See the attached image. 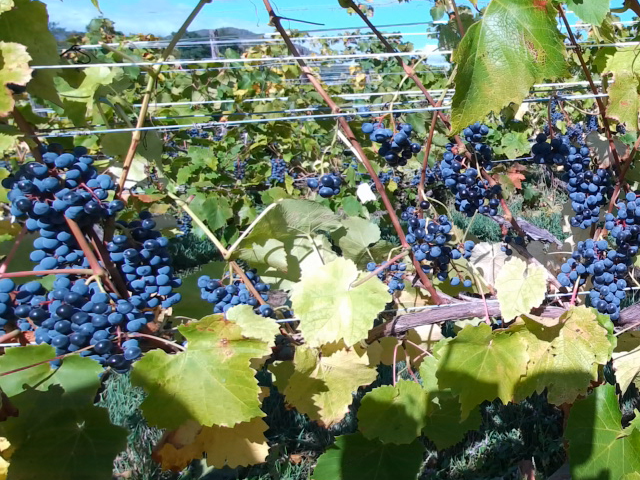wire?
<instances>
[{
	"label": "wire",
	"instance_id": "wire-1",
	"mask_svg": "<svg viewBox=\"0 0 640 480\" xmlns=\"http://www.w3.org/2000/svg\"><path fill=\"white\" fill-rule=\"evenodd\" d=\"M452 105H436L431 107H419V108H406V109H391L385 111H354V112H338V113H321L317 115H281L273 118H247L237 120H217L216 122H198L192 125L181 124H161L153 126H134V127H121L114 129H93L90 131L85 130H70L62 132H44V133H28V138H46V137H64L72 135L92 136L96 134H116L123 132H137V131H155L163 129H179V130H194L201 127H219L220 125H239L249 123H275L283 120H306L314 121L324 118H341V117H359V116H387V115H404L409 113H422V112H434L439 110H452Z\"/></svg>",
	"mask_w": 640,
	"mask_h": 480
},
{
	"label": "wire",
	"instance_id": "wire-2",
	"mask_svg": "<svg viewBox=\"0 0 640 480\" xmlns=\"http://www.w3.org/2000/svg\"><path fill=\"white\" fill-rule=\"evenodd\" d=\"M443 54L452 55L453 51L449 49H440L438 51H397V52H390V53L344 54L340 56L333 55V54H320V55L300 54V55L262 57V58L236 57V58H226L223 60L210 59V58H190V59H173V60L158 61V62H135V63L109 61L101 64H42V65H35L34 69L35 70L103 69L111 66L137 68V67H160V66H170L175 64H192V63H208V64L225 65L228 63H238V62L264 63V62L292 61V60H302V59H307V60L331 59L335 61H342L346 59L393 58V57H400V56H441Z\"/></svg>",
	"mask_w": 640,
	"mask_h": 480
},
{
	"label": "wire",
	"instance_id": "wire-3",
	"mask_svg": "<svg viewBox=\"0 0 640 480\" xmlns=\"http://www.w3.org/2000/svg\"><path fill=\"white\" fill-rule=\"evenodd\" d=\"M499 303L498 299H485V300H470V301H462V302H450L443 304H430V305H420V306H398L393 308H387L383 310L384 314L395 313L400 311H423V310H432V309H445L452 306H470V305H484V304H495Z\"/></svg>",
	"mask_w": 640,
	"mask_h": 480
},
{
	"label": "wire",
	"instance_id": "wire-4",
	"mask_svg": "<svg viewBox=\"0 0 640 480\" xmlns=\"http://www.w3.org/2000/svg\"><path fill=\"white\" fill-rule=\"evenodd\" d=\"M593 97L609 98L610 94L601 93V92H590L586 94H554V95H548V96L526 97L523 99V102L528 103V102H535V101H550V100H557V99H589Z\"/></svg>",
	"mask_w": 640,
	"mask_h": 480
}]
</instances>
